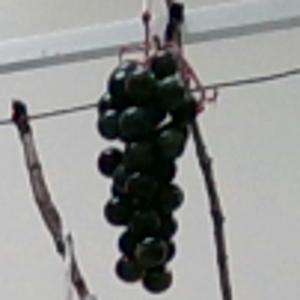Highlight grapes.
I'll use <instances>...</instances> for the list:
<instances>
[{"instance_id": "01657485", "label": "grapes", "mask_w": 300, "mask_h": 300, "mask_svg": "<svg viewBox=\"0 0 300 300\" xmlns=\"http://www.w3.org/2000/svg\"><path fill=\"white\" fill-rule=\"evenodd\" d=\"M180 51L161 47L144 62L121 61L107 81V92L96 105L101 139L125 144L101 149L96 162L100 176L112 180V197L104 207L109 225L127 227L118 238L122 257L115 265L121 282L141 281L158 293L170 287L167 263L179 229L175 212L185 193L173 182L200 105L183 74Z\"/></svg>"}]
</instances>
